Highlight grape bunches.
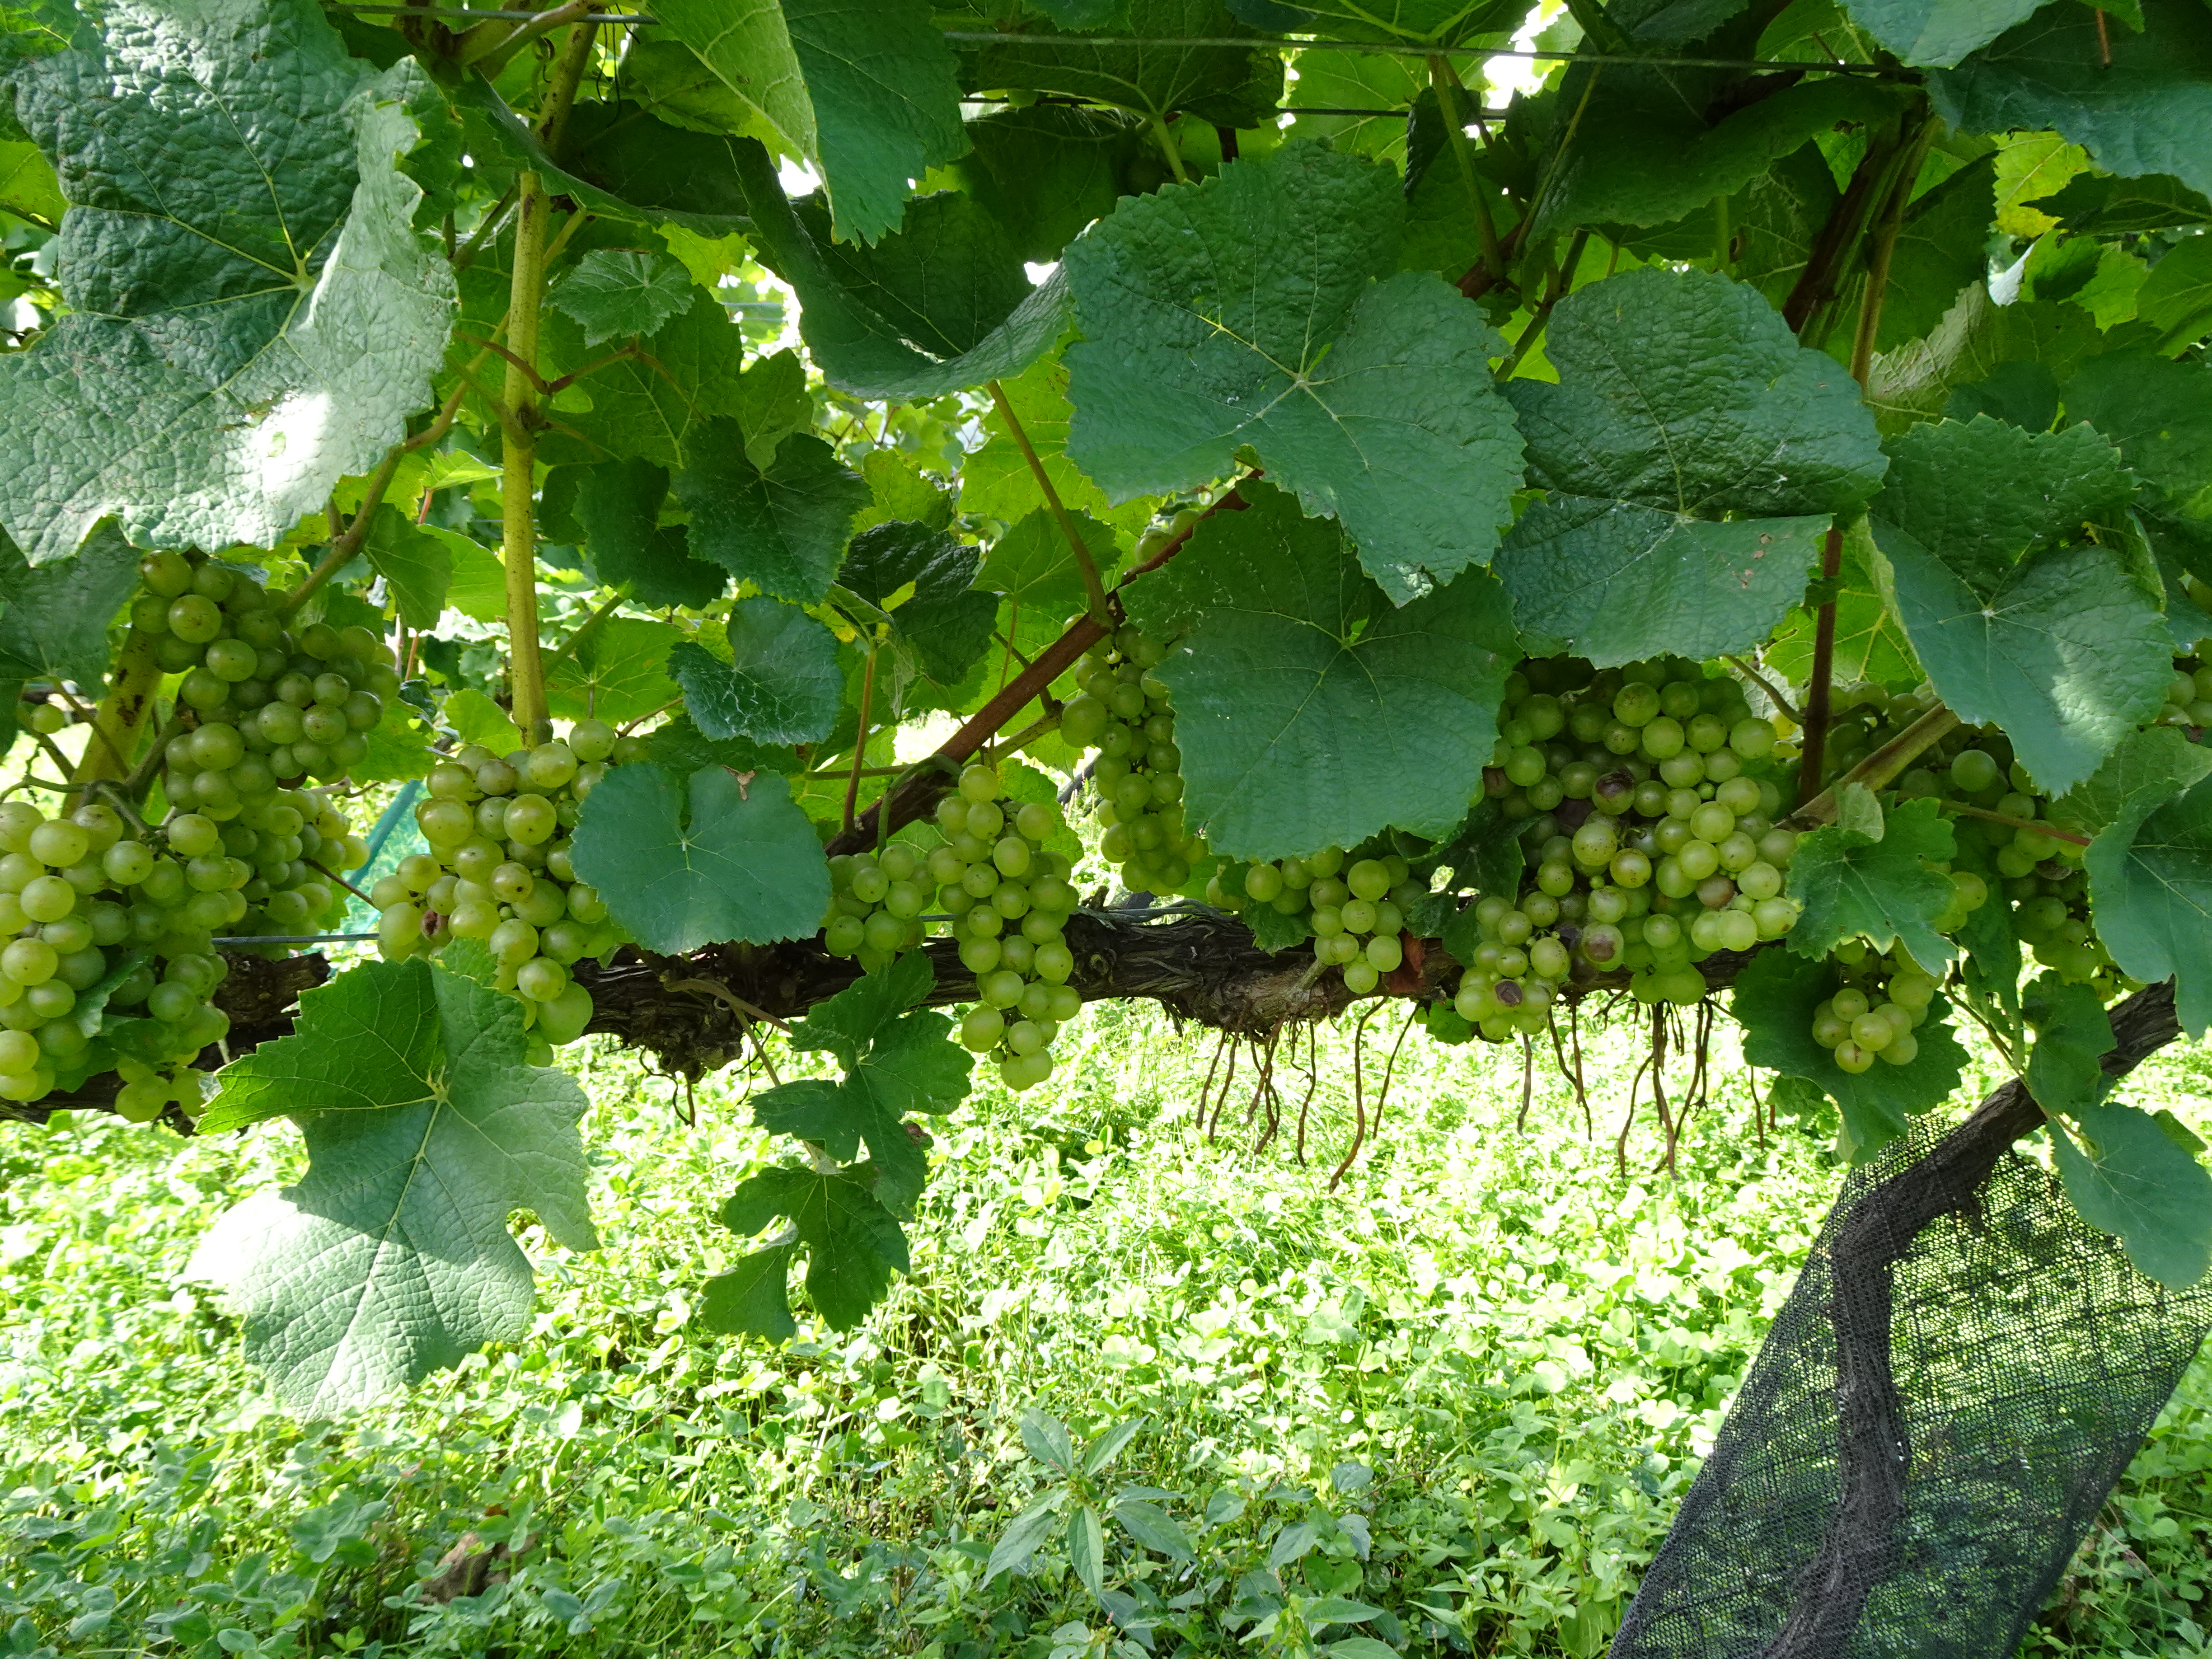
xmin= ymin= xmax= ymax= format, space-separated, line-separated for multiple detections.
xmin=1789 ymin=684 xmax=2149 ymax=1002
xmin=932 ymin=765 xmax=1082 ymax=1090
xmin=1482 ymin=655 xmax=1798 ymax=1003
xmin=1206 ymin=844 xmax=1365 ymax=914
xmin=372 ymin=720 xmax=649 ymax=1069
xmin=113 ymin=813 xmax=252 ymax=1122
xmin=218 ymin=788 xmax=372 ymax=950
xmin=1140 ymin=513 xmax=1202 ymax=567
xmin=1309 ymin=854 xmax=1426 ymax=993
xmin=1059 ymin=611 xmax=1207 ymax=897
xmin=827 ymin=842 xmax=939 ymax=974
xmin=2156 ymin=576 xmax=2212 ymax=728
xmin=0 ymin=802 xmax=166 ymax=1100
xmin=28 ymin=703 xmax=64 ymax=734
xmin=1813 ymin=854 xmax=1988 ymax=1073
xmin=131 ymin=549 xmax=402 ymax=820
xmin=1456 ymin=890 xmax=1573 ymax=1039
